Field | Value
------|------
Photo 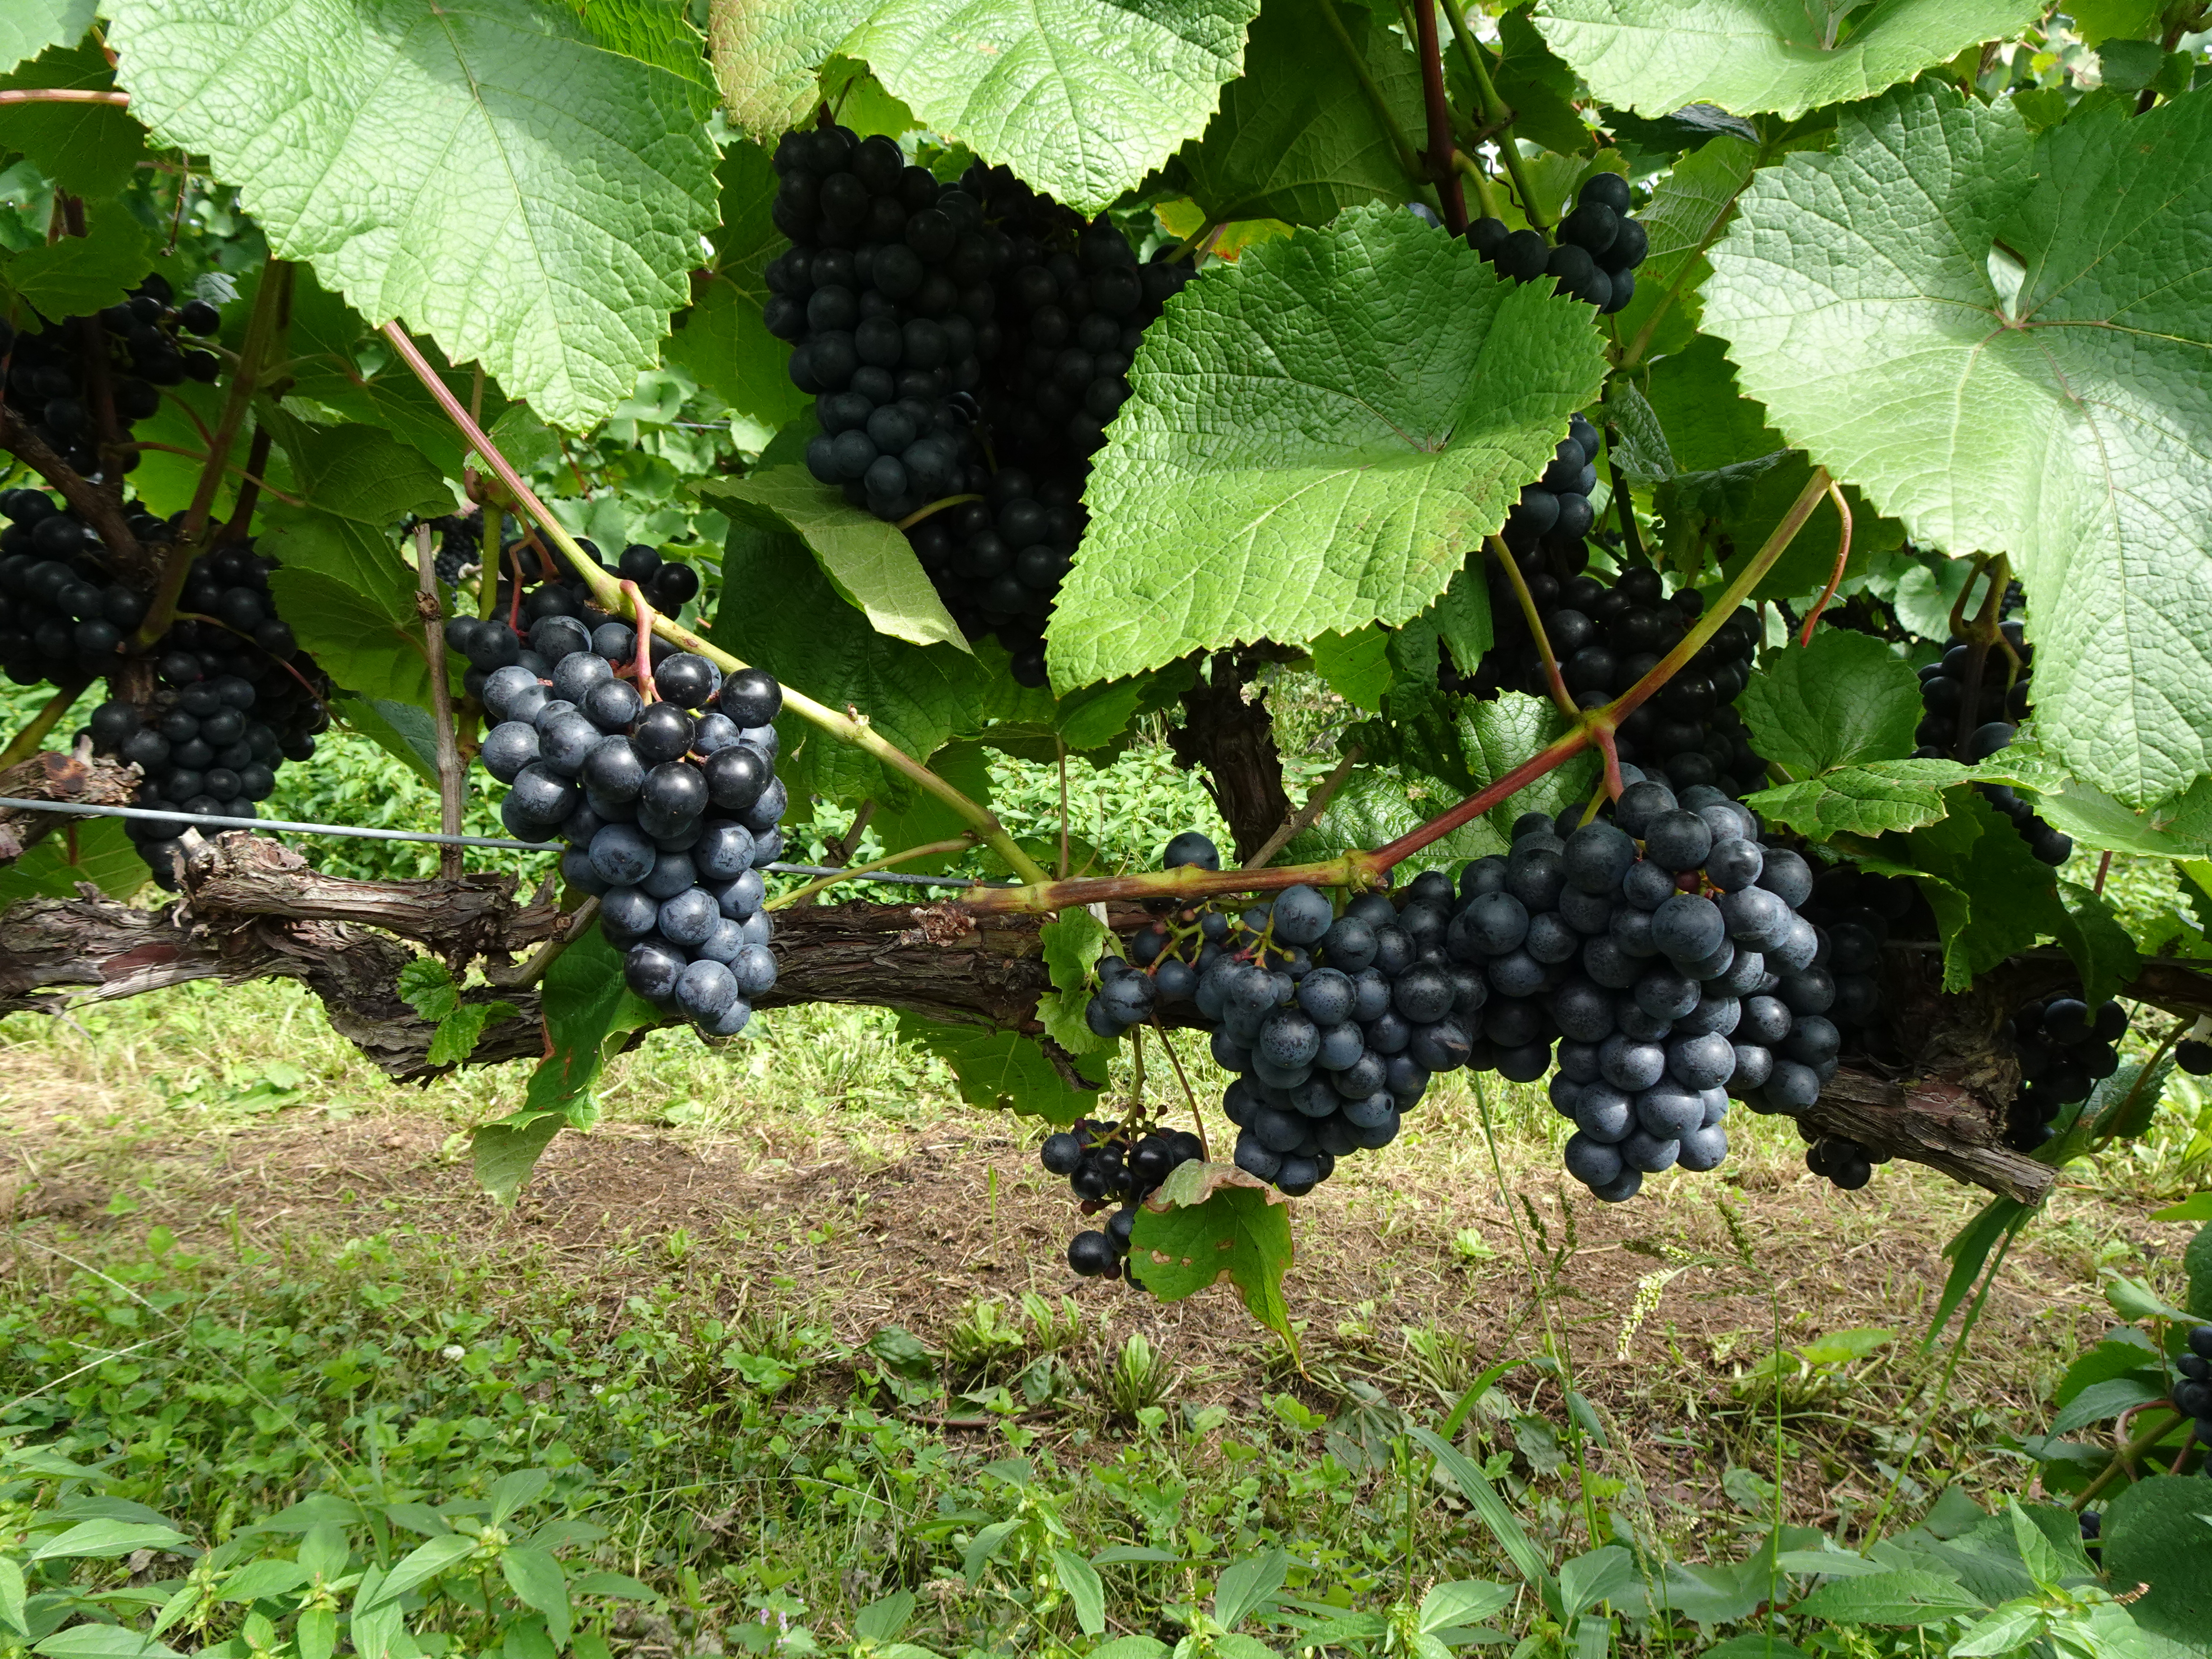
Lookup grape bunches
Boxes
[829,1464,867,1491]
[1041,1119,1205,1290]
[69,550,331,896]
[910,467,1091,692]
[446,527,698,700]
[478,618,790,1034]
[765,124,1001,520]
[1086,831,1227,1038]
[1796,847,1931,1191]
[1724,902,1885,1116]
[1469,174,1649,315]
[2169,1322,2212,1478]
[1910,621,2072,866]
[1500,420,1600,574]
[1451,784,1816,1202]
[0,274,220,477]
[979,212,1202,488]
[1198,862,1487,1199]
[1997,996,2128,1155]
[1525,568,1768,794]
[0,485,167,689]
